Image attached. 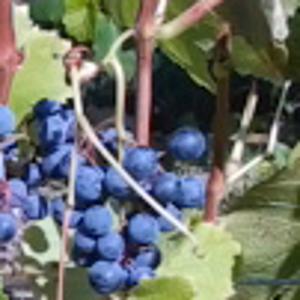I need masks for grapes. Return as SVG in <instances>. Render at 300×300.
<instances>
[{
    "label": "grapes",
    "mask_w": 300,
    "mask_h": 300,
    "mask_svg": "<svg viewBox=\"0 0 300 300\" xmlns=\"http://www.w3.org/2000/svg\"><path fill=\"white\" fill-rule=\"evenodd\" d=\"M75 164L68 228L75 231L72 262L87 269L86 285L97 295H112L127 293L142 278L153 280L163 264L156 242L174 225L111 166H93L84 156Z\"/></svg>",
    "instance_id": "01657485"
},
{
    "label": "grapes",
    "mask_w": 300,
    "mask_h": 300,
    "mask_svg": "<svg viewBox=\"0 0 300 300\" xmlns=\"http://www.w3.org/2000/svg\"><path fill=\"white\" fill-rule=\"evenodd\" d=\"M39 124L40 147L45 155L39 163L29 162L11 179L7 163L15 160L20 145L12 130L15 113L0 107V245L8 246L18 235V227L28 220H45L56 225L65 222L68 201L70 154L77 144L74 131L78 115L65 103L39 101L34 106Z\"/></svg>",
    "instance_id": "b958b902"
},
{
    "label": "grapes",
    "mask_w": 300,
    "mask_h": 300,
    "mask_svg": "<svg viewBox=\"0 0 300 300\" xmlns=\"http://www.w3.org/2000/svg\"><path fill=\"white\" fill-rule=\"evenodd\" d=\"M124 135L118 136L115 126L97 132L101 145L146 194L162 204L174 219H180L183 211L203 209L206 187L200 179L180 177L174 170L163 172L160 149L155 144L137 145L130 130Z\"/></svg>",
    "instance_id": "0513c4c2"
},
{
    "label": "grapes",
    "mask_w": 300,
    "mask_h": 300,
    "mask_svg": "<svg viewBox=\"0 0 300 300\" xmlns=\"http://www.w3.org/2000/svg\"><path fill=\"white\" fill-rule=\"evenodd\" d=\"M165 144L168 154L182 162L197 161L207 150L206 134L190 126L173 129L165 137Z\"/></svg>",
    "instance_id": "84f90ec7"
}]
</instances>
